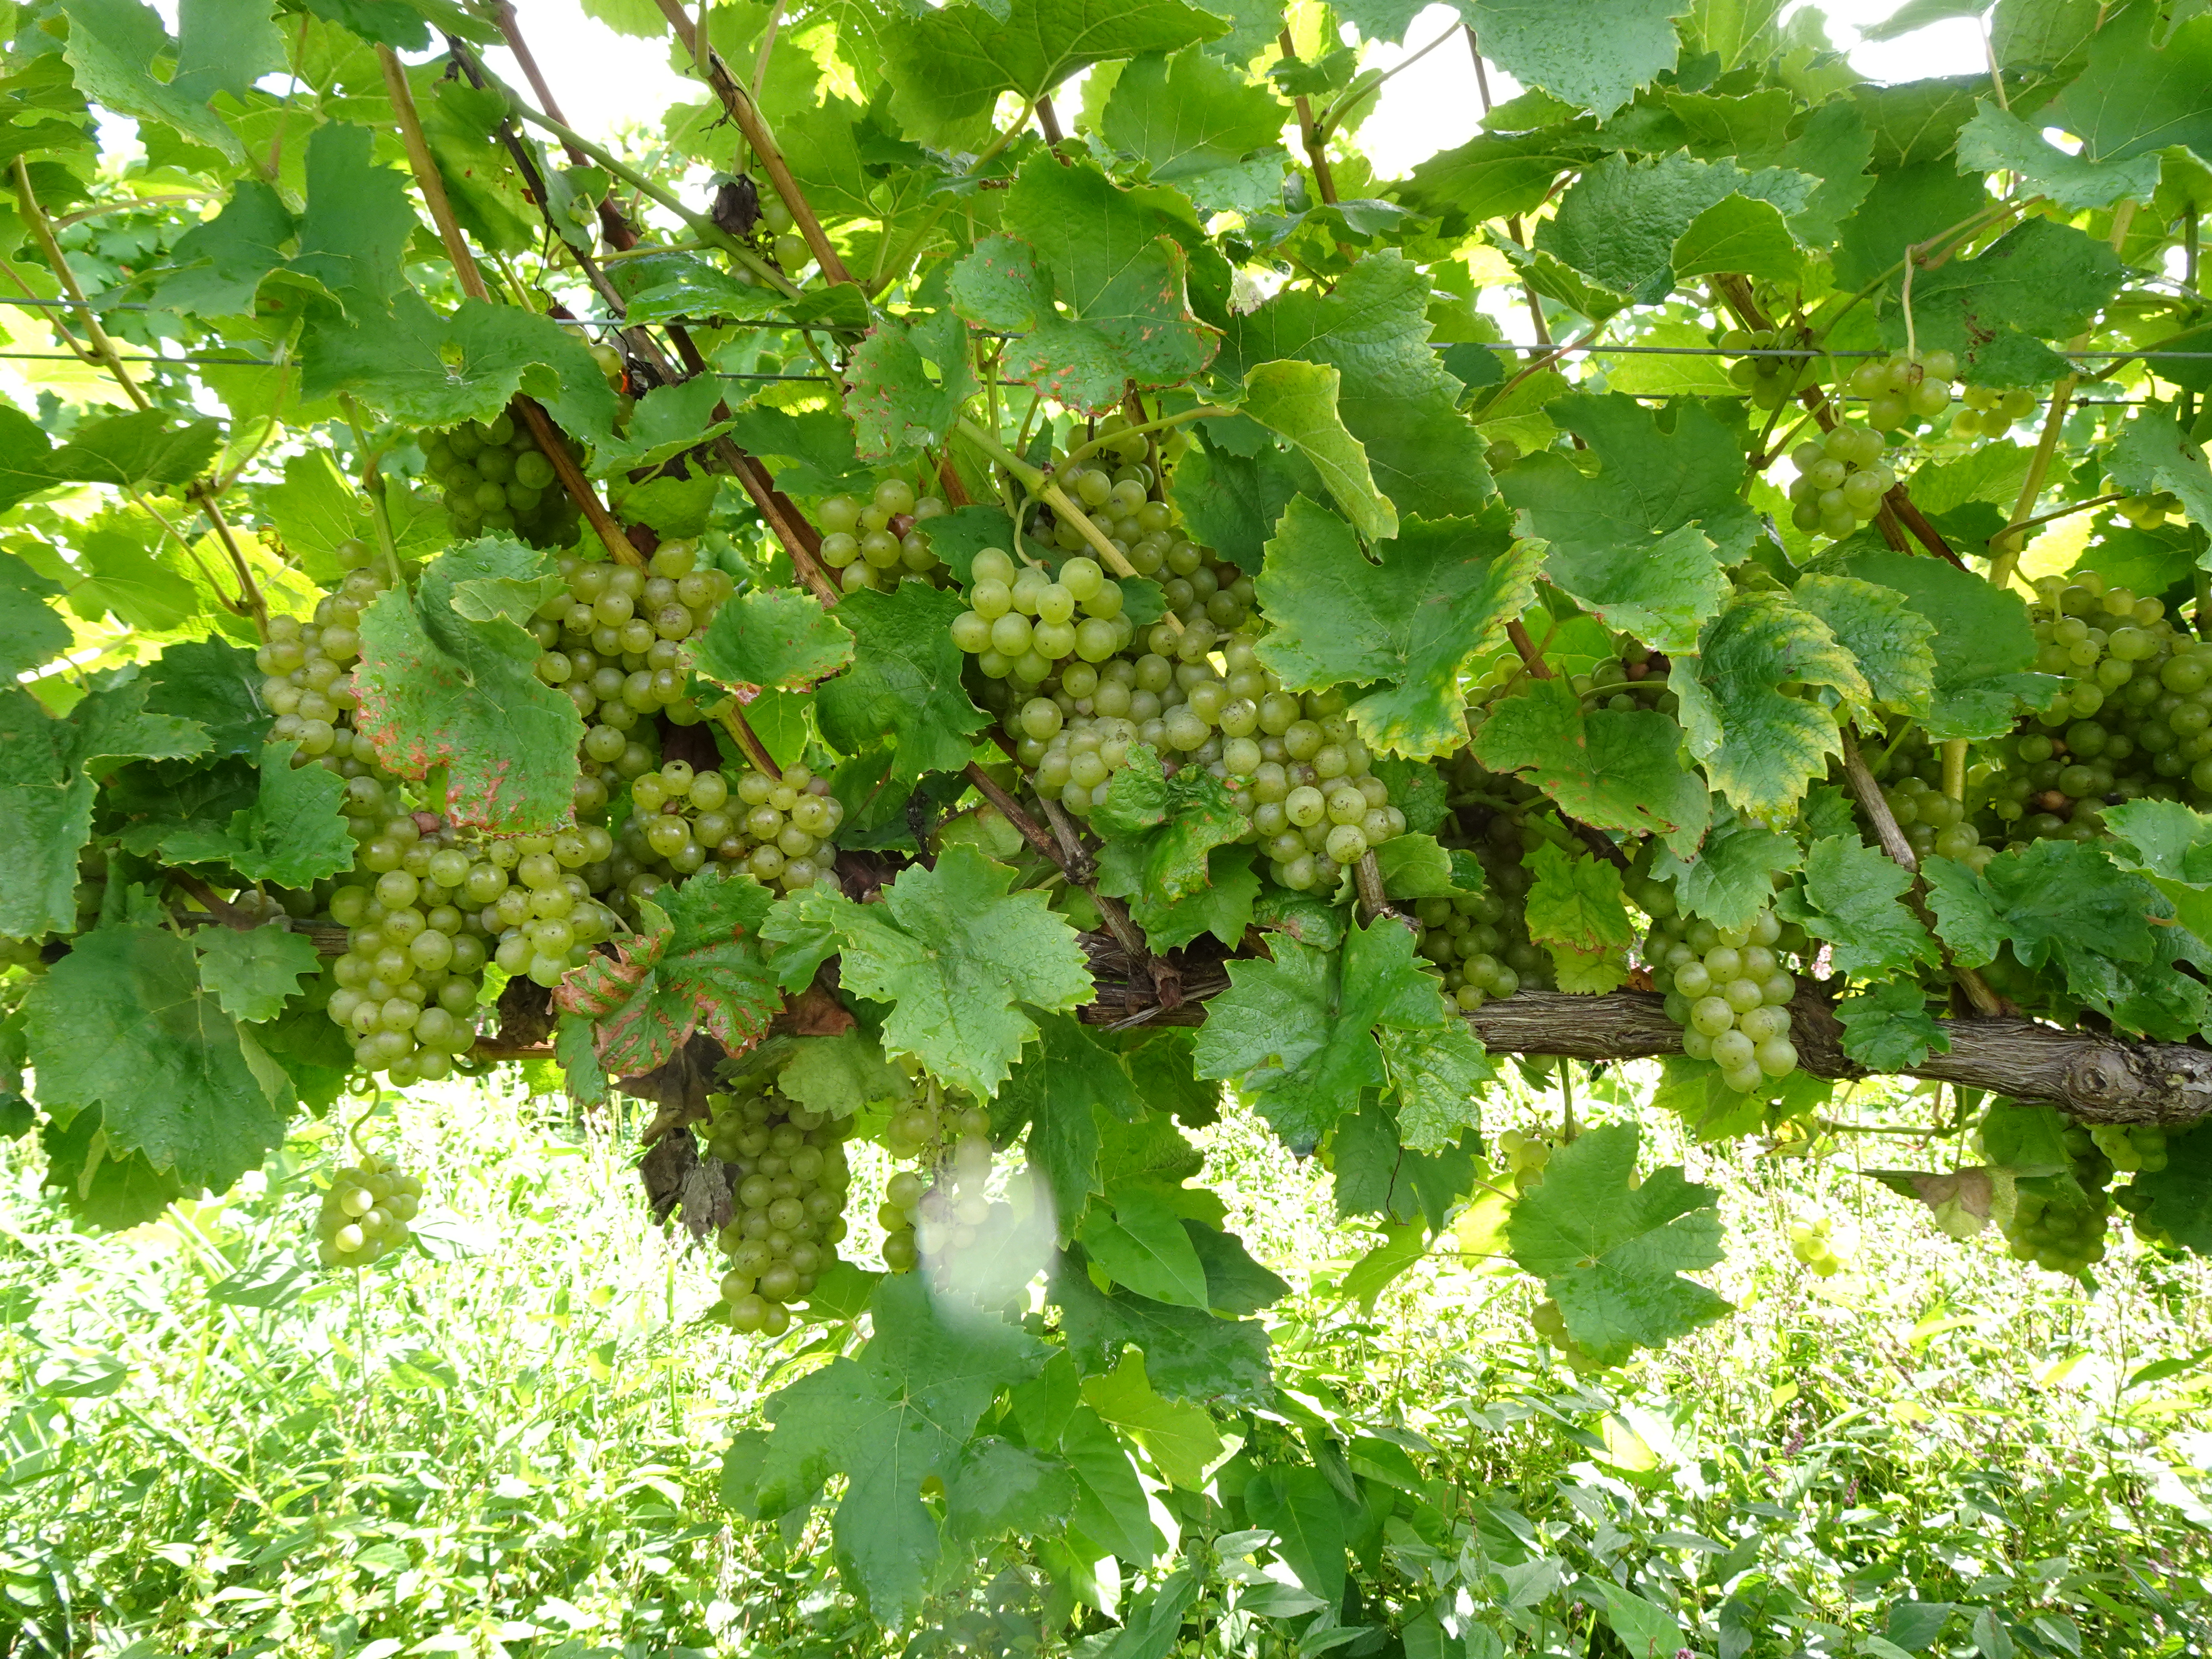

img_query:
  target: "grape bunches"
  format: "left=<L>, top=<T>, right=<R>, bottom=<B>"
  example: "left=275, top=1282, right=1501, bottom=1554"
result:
left=2099, top=473, right=2185, bottom=530
left=1859, top=715, right=1999, bottom=883
left=257, top=540, right=509, bottom=918
left=1850, top=347, right=1959, bottom=432
left=555, top=323, right=636, bottom=426
left=2106, top=634, right=2212, bottom=816
left=523, top=613, right=665, bottom=822
left=0, top=923, right=47, bottom=1140
left=1717, top=327, right=1819, bottom=412
left=482, top=825, right=614, bottom=989
left=1064, top=415, right=1156, bottom=494
left=2114, top=1171, right=2188, bottom=1249
left=1952, top=384, right=2037, bottom=440
left=721, top=194, right=809, bottom=298
left=1042, top=469, right=1257, bottom=632
left=1621, top=837, right=1808, bottom=1093
left=1416, top=873, right=1518, bottom=1013
left=1998, top=1111, right=2113, bottom=1278
left=696, top=1089, right=851, bottom=1335
left=1430, top=653, right=1559, bottom=817
left=878, top=1051, right=1032, bottom=1313
left=1466, top=815, right=1556, bottom=989
left=8, top=840, right=187, bottom=946
left=979, top=624, right=1206, bottom=807
left=535, top=540, right=737, bottom=726
left=632, top=760, right=751, bottom=879
left=2026, top=569, right=2165, bottom=726
left=1499, top=1121, right=1592, bottom=1194
left=737, top=762, right=845, bottom=893
left=1789, top=424, right=1896, bottom=540
left=1166, top=631, right=1404, bottom=898
left=1531, top=1301, right=1612, bottom=1374
left=816, top=480, right=961, bottom=593
left=313, top=1153, right=422, bottom=1267
left=574, top=815, right=685, bottom=936
left=326, top=868, right=490, bottom=1079
left=952, top=547, right=1135, bottom=697
left=1963, top=704, right=2181, bottom=844
left=415, top=402, right=583, bottom=550
left=1571, top=631, right=1680, bottom=726
left=2085, top=1121, right=2168, bottom=1172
